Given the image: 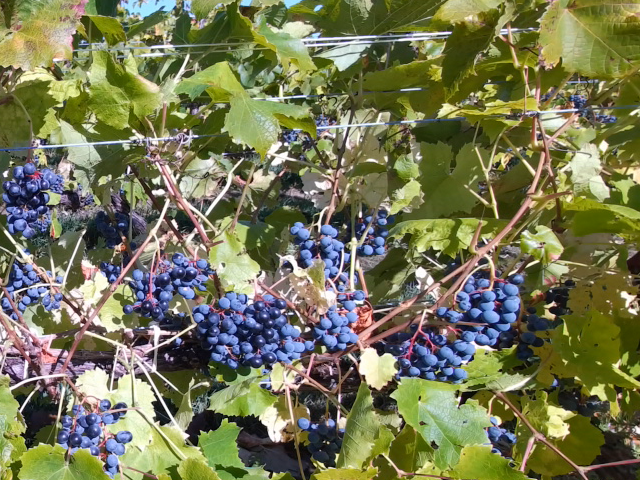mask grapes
<instances>
[{
	"label": "grapes",
	"instance_id": "1",
	"mask_svg": "<svg viewBox=\"0 0 640 480\" xmlns=\"http://www.w3.org/2000/svg\"><path fill=\"white\" fill-rule=\"evenodd\" d=\"M245 293L226 292L217 299L223 317L211 312L208 305L191 309L197 325V339L204 351H211V359L238 369L240 364L253 369L279 361L291 363L307 351L315 349L311 340L294 341L301 337L298 328L287 322L280 309L286 301L264 295L261 301L248 305Z\"/></svg>",
	"mask_w": 640,
	"mask_h": 480
},
{
	"label": "grapes",
	"instance_id": "2",
	"mask_svg": "<svg viewBox=\"0 0 640 480\" xmlns=\"http://www.w3.org/2000/svg\"><path fill=\"white\" fill-rule=\"evenodd\" d=\"M524 282L522 274H513L507 283L496 282L494 291L481 289L491 286L490 272L488 270L472 273L461 291L457 293L458 308L464 312L440 307L437 314L450 323H488V326H464L462 339H455L452 344H447L445 335H437L430 329H423L424 335L430 342L442 346L437 354L434 349L423 343L413 345V355L410 359L399 358L396 379L408 376H423L428 380L452 381L462 383L468 377V372L458 369L462 361H471L474 358L477 345H496L502 331H508L510 324L518 319L516 311L520 309V286ZM424 335L418 338L426 340Z\"/></svg>",
	"mask_w": 640,
	"mask_h": 480
},
{
	"label": "grapes",
	"instance_id": "3",
	"mask_svg": "<svg viewBox=\"0 0 640 480\" xmlns=\"http://www.w3.org/2000/svg\"><path fill=\"white\" fill-rule=\"evenodd\" d=\"M173 263L176 265L171 268V262L164 260L157 268L156 274L152 276L149 272H143L139 269L132 271V277L135 281L129 283V287L135 291L138 301L133 305L125 304L123 312L131 314L133 311L142 313L145 318H150L155 322H160L165 318V313L170 307V301L174 298L175 290L180 296L188 301L196 298V291L192 287H197L200 292H205L206 284L209 280L208 275H215L217 270L211 268L205 259H199L196 263L190 260L182 253L176 252L172 256ZM155 294L159 292L158 299L153 295L147 297L149 292Z\"/></svg>",
	"mask_w": 640,
	"mask_h": 480
},
{
	"label": "grapes",
	"instance_id": "4",
	"mask_svg": "<svg viewBox=\"0 0 640 480\" xmlns=\"http://www.w3.org/2000/svg\"><path fill=\"white\" fill-rule=\"evenodd\" d=\"M38 172V167L33 163L16 165L13 168V181L2 183V200L7 203L6 211L8 231L18 234L20 231L25 238H33L36 229L29 226L28 222H35L39 216L47 212V204L50 202V194L42 192L49 190L58 183V176L49 168H42L39 171V179L35 180L28 175Z\"/></svg>",
	"mask_w": 640,
	"mask_h": 480
},
{
	"label": "grapes",
	"instance_id": "5",
	"mask_svg": "<svg viewBox=\"0 0 640 480\" xmlns=\"http://www.w3.org/2000/svg\"><path fill=\"white\" fill-rule=\"evenodd\" d=\"M84 407L81 405H74L71 407L72 415H79L77 417V423L75 424L74 432L72 433L73 420L72 416L66 414L62 417V431L58 432L57 442L64 449H68L69 446H74L69 454L73 455L79 449H90V454L99 456L101 454L100 448L97 446L101 441L102 435V422L104 425H114L123 418L127 411L116 413H104L103 415H97L96 413L83 414Z\"/></svg>",
	"mask_w": 640,
	"mask_h": 480
},
{
	"label": "grapes",
	"instance_id": "6",
	"mask_svg": "<svg viewBox=\"0 0 640 480\" xmlns=\"http://www.w3.org/2000/svg\"><path fill=\"white\" fill-rule=\"evenodd\" d=\"M337 306L332 304L327 310V316L320 318V326L312 329V336L316 340H323L324 346L329 350L346 351L347 344H356L359 341V335L352 333L350 329L351 323L358 321V315L348 312L345 316H341L335 312Z\"/></svg>",
	"mask_w": 640,
	"mask_h": 480
},
{
	"label": "grapes",
	"instance_id": "7",
	"mask_svg": "<svg viewBox=\"0 0 640 480\" xmlns=\"http://www.w3.org/2000/svg\"><path fill=\"white\" fill-rule=\"evenodd\" d=\"M321 233L324 235L320 239V247L326 256L323 261L326 265V269L323 272V276L326 279L331 277H337L340 273L338 268L341 265V253L346 249V244L338 239L339 230L332 224H324L321 227Z\"/></svg>",
	"mask_w": 640,
	"mask_h": 480
},
{
	"label": "grapes",
	"instance_id": "8",
	"mask_svg": "<svg viewBox=\"0 0 640 480\" xmlns=\"http://www.w3.org/2000/svg\"><path fill=\"white\" fill-rule=\"evenodd\" d=\"M41 281V277L36 271L33 270V266L30 263H25L23 266L18 260L13 262L12 270L9 277V283L6 286L7 294L10 295V299H14V292L20 290L24 283L27 286L38 284ZM8 297L1 299V310L3 312L11 311L13 305Z\"/></svg>",
	"mask_w": 640,
	"mask_h": 480
},
{
	"label": "grapes",
	"instance_id": "9",
	"mask_svg": "<svg viewBox=\"0 0 640 480\" xmlns=\"http://www.w3.org/2000/svg\"><path fill=\"white\" fill-rule=\"evenodd\" d=\"M134 439V435L129 430L118 431L116 439H109L105 442L106 451L115 455H108L106 458L107 474L110 479H114V474L118 473L119 459L117 456L125 455V447L123 443H130Z\"/></svg>",
	"mask_w": 640,
	"mask_h": 480
},
{
	"label": "grapes",
	"instance_id": "10",
	"mask_svg": "<svg viewBox=\"0 0 640 480\" xmlns=\"http://www.w3.org/2000/svg\"><path fill=\"white\" fill-rule=\"evenodd\" d=\"M292 235H297L295 243L300 246V258L307 266H310L314 260L316 242L311 237V232L303 221H296L294 226L289 229Z\"/></svg>",
	"mask_w": 640,
	"mask_h": 480
},
{
	"label": "grapes",
	"instance_id": "11",
	"mask_svg": "<svg viewBox=\"0 0 640 480\" xmlns=\"http://www.w3.org/2000/svg\"><path fill=\"white\" fill-rule=\"evenodd\" d=\"M418 324H414L410 327V333H395L391 336L394 343H387L383 346V352L390 353L395 356L406 355L411 348V337L417 333Z\"/></svg>",
	"mask_w": 640,
	"mask_h": 480
},
{
	"label": "grapes",
	"instance_id": "12",
	"mask_svg": "<svg viewBox=\"0 0 640 480\" xmlns=\"http://www.w3.org/2000/svg\"><path fill=\"white\" fill-rule=\"evenodd\" d=\"M389 236V230L387 228H380L377 232L376 237L371 239L372 245H359L356 248V252L358 254L363 255H379L383 256L386 253L385 249V238Z\"/></svg>",
	"mask_w": 640,
	"mask_h": 480
},
{
	"label": "grapes",
	"instance_id": "13",
	"mask_svg": "<svg viewBox=\"0 0 640 480\" xmlns=\"http://www.w3.org/2000/svg\"><path fill=\"white\" fill-rule=\"evenodd\" d=\"M489 422L494 426L487 427L485 429L486 436L492 442L506 441L508 444H515L517 442V436L514 433H510L506 427H499L498 420L495 417H491Z\"/></svg>",
	"mask_w": 640,
	"mask_h": 480
},
{
	"label": "grapes",
	"instance_id": "14",
	"mask_svg": "<svg viewBox=\"0 0 640 480\" xmlns=\"http://www.w3.org/2000/svg\"><path fill=\"white\" fill-rule=\"evenodd\" d=\"M47 291V287L41 286L37 288H27L26 295H23L21 298V302L18 303L17 310L20 315H23L22 311H25L28 306L32 304H37L38 298L41 297V294H44Z\"/></svg>",
	"mask_w": 640,
	"mask_h": 480
},
{
	"label": "grapes",
	"instance_id": "15",
	"mask_svg": "<svg viewBox=\"0 0 640 480\" xmlns=\"http://www.w3.org/2000/svg\"><path fill=\"white\" fill-rule=\"evenodd\" d=\"M351 298L353 300H349L346 294H339L337 301L348 311H353L357 307V303L354 300L363 301L367 298V294L362 290H356L352 293Z\"/></svg>",
	"mask_w": 640,
	"mask_h": 480
},
{
	"label": "grapes",
	"instance_id": "16",
	"mask_svg": "<svg viewBox=\"0 0 640 480\" xmlns=\"http://www.w3.org/2000/svg\"><path fill=\"white\" fill-rule=\"evenodd\" d=\"M121 273V267L118 265H112L107 260H103L101 263V274L108 279L110 283L117 281Z\"/></svg>",
	"mask_w": 640,
	"mask_h": 480
},
{
	"label": "grapes",
	"instance_id": "17",
	"mask_svg": "<svg viewBox=\"0 0 640 480\" xmlns=\"http://www.w3.org/2000/svg\"><path fill=\"white\" fill-rule=\"evenodd\" d=\"M63 300V295L61 293H56L54 295V301H52V297L50 295H45L43 297L42 305L45 306L46 311L59 310L61 308V301Z\"/></svg>",
	"mask_w": 640,
	"mask_h": 480
},
{
	"label": "grapes",
	"instance_id": "18",
	"mask_svg": "<svg viewBox=\"0 0 640 480\" xmlns=\"http://www.w3.org/2000/svg\"><path fill=\"white\" fill-rule=\"evenodd\" d=\"M297 427L304 431L317 430L320 427V424L312 423L309 419L300 417L297 421Z\"/></svg>",
	"mask_w": 640,
	"mask_h": 480
},
{
	"label": "grapes",
	"instance_id": "19",
	"mask_svg": "<svg viewBox=\"0 0 640 480\" xmlns=\"http://www.w3.org/2000/svg\"><path fill=\"white\" fill-rule=\"evenodd\" d=\"M378 217H379V219L377 220V223L380 226L390 225V224H393L395 222V218L393 216H390L389 218H386L387 217V212L385 210H380L378 212Z\"/></svg>",
	"mask_w": 640,
	"mask_h": 480
},
{
	"label": "grapes",
	"instance_id": "20",
	"mask_svg": "<svg viewBox=\"0 0 640 480\" xmlns=\"http://www.w3.org/2000/svg\"><path fill=\"white\" fill-rule=\"evenodd\" d=\"M340 280L343 282V284L347 286L350 283V273L348 271H345L344 273H342L340 275ZM333 284L335 285V287L340 293H344L346 291V288L343 284L338 285V282Z\"/></svg>",
	"mask_w": 640,
	"mask_h": 480
}]
</instances>
